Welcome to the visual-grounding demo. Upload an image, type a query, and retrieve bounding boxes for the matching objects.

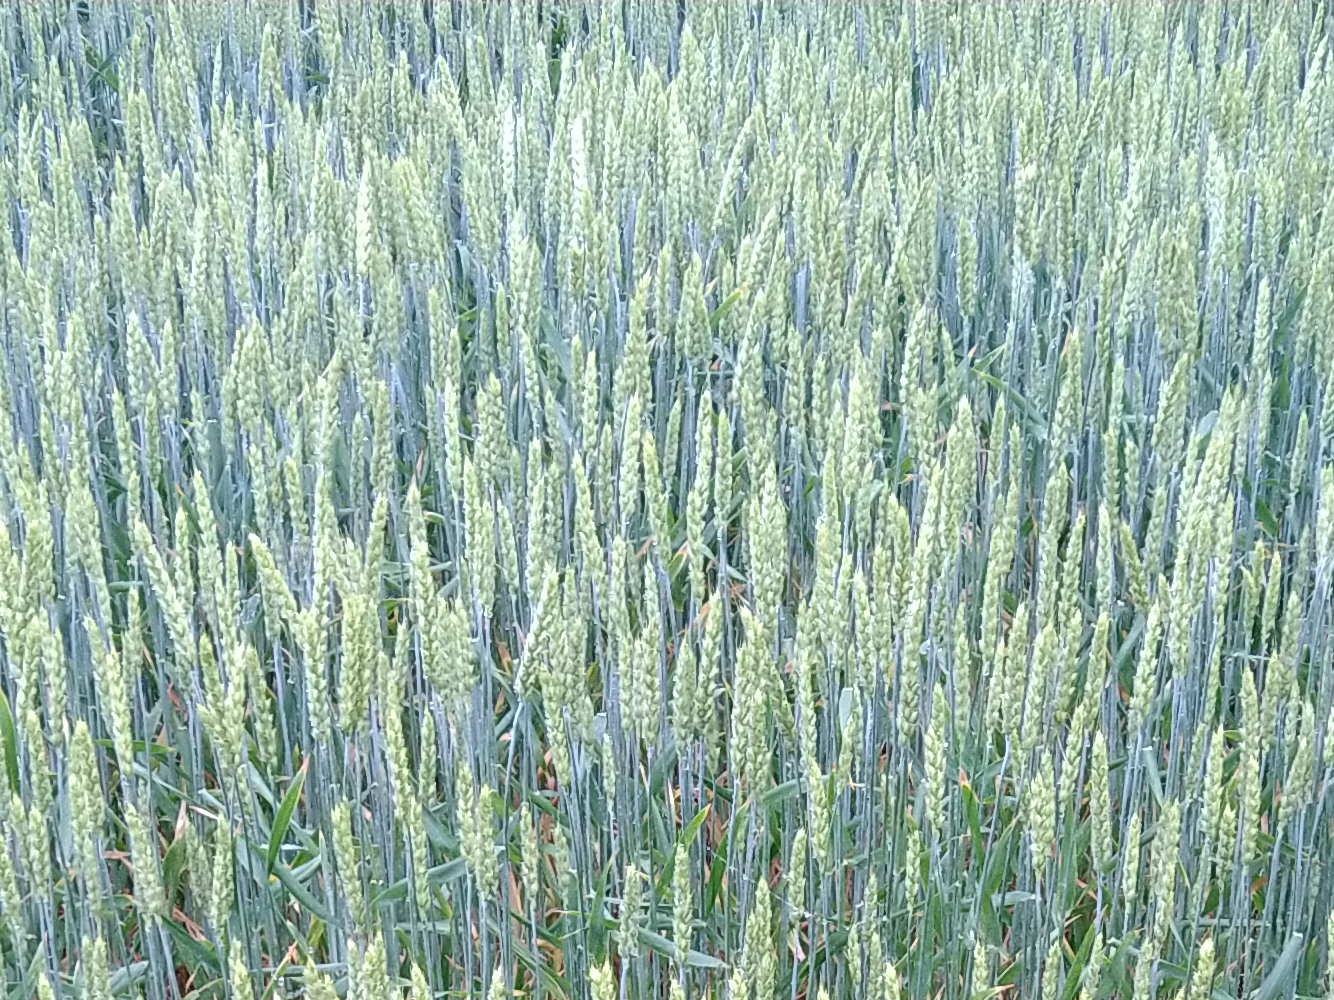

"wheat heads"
[210,103,225,178]
[916,396,930,477]
[841,118,851,181]
[188,0,204,63]
[1279,179,1287,238]
[509,221,523,311]
[1019,634,1047,738]
[187,825,210,917]
[618,869,639,949]
[404,125,415,161]
[641,557,665,641]
[249,321,280,421]
[764,416,779,448]
[64,255,76,312]
[0,0,6,38]
[1057,516,1086,634]
[343,137,354,192]
[1104,114,1112,156]
[36,540,54,608]
[557,163,571,281]
[529,250,545,340]
[824,448,843,548]
[335,183,350,241]
[993,493,1004,528]
[140,90,163,195]
[72,301,91,394]
[84,838,102,916]
[1116,32,1126,65]
[687,312,698,357]
[437,61,469,135]
[175,0,184,17]
[927,218,940,294]
[1000,326,1019,394]
[1077,153,1099,235]
[1026,164,1042,203]
[986,635,1003,728]
[45,129,58,189]
[1113,270,1126,350]
[761,0,769,59]
[930,311,940,350]
[230,0,244,57]
[906,383,918,459]
[1242,755,1255,861]
[771,500,787,574]
[197,181,206,214]
[318,378,325,431]
[854,689,863,772]
[174,511,191,609]
[927,391,938,465]
[1203,0,1220,16]
[1224,271,1244,363]
[95,359,106,395]
[128,587,141,656]
[1075,101,1089,135]
[1058,609,1083,705]
[1049,380,1069,472]
[171,276,181,353]
[773,40,781,97]
[1329,909,1334,1000]
[244,644,276,763]
[670,853,690,960]
[635,177,651,289]
[1044,945,1062,1000]
[928,545,960,644]
[873,265,883,324]
[1322,636,1334,755]
[188,88,208,139]
[368,0,387,18]
[620,636,633,732]
[1277,121,1288,162]
[1325,50,1334,86]
[734,298,750,335]
[899,250,918,307]
[570,336,587,436]
[223,645,249,722]
[869,403,883,450]
[704,9,716,39]
[456,44,464,79]
[813,67,828,122]
[583,92,595,149]
[1171,0,1182,31]
[875,485,886,542]
[586,3,600,46]
[56,160,67,247]
[515,325,541,413]
[1219,64,1234,106]
[903,41,916,84]
[0,45,12,105]
[1323,290,1334,372]
[890,509,911,624]
[854,112,888,197]
[1289,6,1298,54]
[685,493,707,600]
[836,553,852,619]
[871,47,880,84]
[69,472,89,562]
[910,220,926,299]
[597,426,615,517]
[1143,488,1168,566]
[1030,1,1043,55]
[630,0,641,44]
[701,39,719,114]
[521,476,546,602]
[283,101,299,165]
[693,392,715,506]
[481,500,494,607]
[868,937,883,1000]
[627,539,643,612]
[364,495,389,597]
[1251,0,1260,41]
[441,0,453,44]
[476,121,492,169]
[1231,137,1242,170]
[237,328,262,425]
[591,964,626,1000]
[859,9,875,48]
[821,185,834,223]
[118,0,128,27]
[273,197,284,271]
[733,0,741,52]
[331,803,366,926]
[393,51,411,136]
[456,760,473,867]
[855,466,871,536]
[716,4,726,74]
[102,0,114,32]
[433,597,450,691]
[961,126,978,218]
[1233,294,1260,364]
[1121,528,1147,611]
[262,428,282,525]
[796,0,810,31]
[301,364,313,462]
[564,90,579,157]
[981,397,1005,530]
[21,303,48,385]
[824,16,838,81]
[684,26,706,79]
[171,59,188,107]
[782,331,802,427]
[1113,87,1126,146]
[1243,572,1255,637]
[1260,651,1278,747]
[225,96,236,137]
[1159,198,1171,238]
[408,482,429,582]
[1203,729,1225,830]
[984,129,1004,223]
[1182,265,1199,350]
[1086,350,1104,426]
[193,210,215,298]
[791,169,808,257]
[932,682,950,740]
[1177,437,1200,535]
[1233,99,1243,144]
[115,153,146,302]
[1244,102,1255,128]
[523,91,542,159]
[1093,734,1107,847]
[826,106,835,141]
[635,318,652,413]
[39,539,52,599]
[40,0,56,27]
[1283,681,1299,748]
[766,259,787,362]
[954,218,976,312]
[441,288,459,340]
[447,38,457,76]
[222,287,234,374]
[645,623,662,743]
[701,158,723,231]
[1110,146,1128,204]
[1182,0,1198,40]
[1047,278,1064,342]
[938,0,945,39]
[1235,16,1247,60]
[521,244,539,329]
[1048,0,1066,56]
[568,182,591,285]
[1266,185,1280,254]
[0,522,13,639]
[386,712,406,811]
[1312,153,1328,208]
[70,391,89,488]
[211,818,235,931]
[1256,55,1271,118]
[1160,33,1172,82]
[45,631,69,746]
[712,116,756,239]
[808,589,817,660]
[883,45,893,85]
[857,407,867,469]
[497,86,509,112]
[923,325,931,383]
[40,421,76,488]
[1047,626,1058,694]
[1129,0,1146,52]
[689,135,706,213]
[112,390,134,474]
[853,84,864,137]
[414,563,439,677]
[10,257,35,311]
[1214,192,1231,260]
[758,954,778,1000]
[635,38,645,80]
[3,160,17,189]
[944,67,962,147]
[685,0,696,24]
[1103,432,1121,525]
[257,22,271,105]
[736,80,753,122]
[868,84,882,129]
[302,616,327,732]
[887,139,898,189]
[766,230,786,294]
[1009,422,1025,493]
[69,160,79,244]
[784,0,792,32]
[1031,209,1053,264]
[1175,64,1193,147]
[228,252,258,314]
[1320,83,1334,148]
[783,119,800,163]
[568,0,581,34]
[623,124,633,193]
[1291,100,1307,147]
[502,48,511,93]
[109,652,134,782]
[1096,263,1113,359]
[619,401,642,517]
[841,926,861,1000]
[758,64,767,98]
[1219,167,1232,209]
[853,570,872,699]
[878,0,897,32]
[1180,941,1216,1000]
[828,403,846,448]
[464,458,479,566]
[1169,25,1186,106]
[774,11,783,44]
[603,734,612,793]
[359,933,387,984]
[1174,223,1186,259]
[1052,121,1075,185]
[174,222,179,254]
[241,8,254,55]
[646,38,657,67]
[416,22,434,74]
[805,138,820,199]
[280,237,290,282]
[477,37,495,110]
[1260,0,1276,34]
[1204,24,1216,90]
[396,0,406,32]
[1157,111,1175,188]
[41,479,49,541]
[1010,261,1022,327]
[1024,207,1039,257]
[1019,3,1029,39]
[539,41,556,136]
[271,133,286,191]
[926,69,940,109]
[620,67,635,122]
[1157,574,1172,629]
[190,389,210,457]
[1148,80,1166,149]
[118,56,126,123]
[319,386,341,470]
[860,874,877,946]
[810,30,825,66]
[1302,145,1317,196]
[601,113,619,210]
[833,143,842,176]
[88,0,101,61]
[68,61,80,123]
[1190,202,1204,264]
[819,140,835,186]
[159,259,174,328]
[486,116,501,184]
[747,211,780,304]
[395,292,406,341]
[70,942,93,1000]
[569,116,587,192]
[672,642,697,730]
[950,148,970,209]
[611,365,627,450]
[311,137,332,230]
[1254,196,1266,261]
[1063,37,1075,73]
[1301,37,1329,132]
[555,55,574,124]
[931,139,947,184]
[814,356,826,450]
[1325,107,1334,207]
[906,0,918,39]
[637,110,647,188]
[378,154,391,249]
[83,736,105,826]
[939,326,956,389]
[321,96,329,132]
[418,709,436,804]
[1219,430,1234,499]
[807,111,824,138]
[86,623,112,737]
[805,58,819,102]
[1048,0,1058,25]
[544,466,563,563]
[634,274,651,313]
[978,356,986,416]
[1054,22,1067,65]
[518,82,530,125]
[668,0,684,34]
[110,218,124,285]
[473,390,487,472]
[226,541,243,616]
[426,390,440,471]
[818,0,828,35]
[0,413,27,504]
[1274,35,1287,101]
[599,218,609,311]
[1178,158,1192,230]
[648,190,661,254]
[462,110,481,138]
[1216,95,1239,142]
[1307,3,1325,67]
[444,382,462,489]
[798,114,813,149]
[1195,81,1218,153]
[317,0,335,55]
[614,116,636,190]
[228,328,250,389]
[389,624,413,704]
[696,294,713,355]
[342,188,359,283]
[333,285,348,367]
[474,1,486,41]
[642,0,654,35]
[658,15,670,69]
[736,910,755,981]
[211,248,226,312]
[809,0,817,30]
[749,504,775,614]
[618,299,641,402]
[21,442,40,501]
[250,13,268,65]
[764,462,776,522]
[1290,412,1308,488]
[22,161,39,214]
[116,56,130,120]
[600,0,614,66]
[167,0,199,103]
[1073,259,1099,348]
[343,940,364,1000]
[557,973,566,1000]
[850,347,864,382]
[194,140,225,190]
[694,598,724,720]
[1183,84,1197,157]
[463,0,475,39]
[579,571,593,622]
[60,323,75,424]
[498,0,510,50]
[158,109,170,137]
[952,634,968,738]
[1051,75,1077,148]
[539,123,570,236]
[91,213,111,294]
[753,105,777,183]
[529,438,538,496]
[1115,208,1137,269]
[6,551,28,661]
[360,967,384,1000]
[1104,160,1113,203]
[882,963,900,1000]
[801,663,813,775]
[1262,551,1281,634]
[17,514,41,627]
[946,22,962,70]
[298,187,310,238]
[563,567,575,621]
[403,797,431,907]
[125,312,141,404]
[973,946,988,1000]
[437,93,463,142]
[1181,727,1209,801]
[655,192,666,252]
[1151,813,1167,896]
[1289,160,1303,228]
[996,0,1007,70]
[284,268,306,346]
[1046,203,1057,276]
[258,571,281,641]
[522,808,536,899]
[840,720,855,789]
[748,49,758,87]
[1229,174,1256,268]
[77,267,94,335]
[788,24,802,55]
[644,58,656,86]
[750,688,768,826]
[879,178,930,318]
[1066,76,1110,194]
[643,429,673,557]
[1169,248,1192,327]
[271,81,289,125]
[1082,614,1110,726]
[146,393,158,484]
[1121,812,1142,899]
[1225,0,1241,29]
[1254,539,1265,584]
[213,38,223,106]
[1228,28,1239,75]
[301,227,315,301]
[745,29,760,74]
[477,306,493,372]
[133,37,141,82]
[916,103,933,178]
[1155,400,1177,470]
[1259,91,1273,176]
[867,3,879,50]
[1132,194,1149,237]
[604,536,625,640]
[305,960,331,1000]
[570,452,591,566]
[1251,276,1270,379]
[413,964,442,1000]
[877,142,888,184]
[466,139,480,182]
[755,448,770,494]
[1133,368,1144,445]
[765,81,782,160]
[1097,504,1111,613]
[280,0,295,63]
[849,23,859,74]
[0,337,9,411]
[806,195,824,290]
[713,415,734,531]
[542,395,564,456]
[518,115,531,205]
[904,77,915,152]
[302,125,317,190]
[156,192,172,267]
[918,468,945,552]
[253,116,272,191]
[1089,935,1103,993]
[529,44,537,85]
[0,828,25,950]
[242,148,258,221]
[982,12,997,90]
[1090,58,1104,93]
[271,315,283,370]
[19,99,28,157]
[942,186,957,224]
[496,285,510,381]
[1031,323,1043,398]
[954,401,975,529]
[815,652,828,695]
[908,831,922,906]
[315,234,328,285]
[358,10,369,52]
[511,572,558,695]
[1150,7,1165,72]
[646,119,660,180]
[263,0,277,29]
[150,0,160,25]
[479,265,492,308]
[200,548,216,637]
[221,0,232,43]
[1140,222,1159,313]
[662,400,682,484]
[1315,464,1334,564]
[58,128,71,167]
[350,412,365,541]
[1271,244,1300,312]
[199,635,222,707]
[160,321,177,419]
[528,49,542,99]
[673,30,687,108]
[81,118,97,184]
[1325,352,1334,431]
[409,93,424,163]
[216,579,238,672]
[314,7,325,58]
[1126,607,1157,726]
[128,475,142,544]
[268,49,282,84]
[152,38,162,111]
[432,157,445,210]
[1251,129,1259,156]
[97,288,111,332]
[175,257,196,308]
[8,311,26,384]
[125,0,144,26]
[1314,188,1334,273]
[43,250,63,325]
[372,70,396,138]
[1294,277,1319,367]
[842,76,864,129]
[451,604,472,689]
[256,160,271,278]
[741,607,793,730]
[1205,266,1223,359]
[379,652,391,722]
[1067,332,1082,440]
[339,122,357,189]
[1012,165,1030,259]
[93,935,113,1000]
[15,612,43,729]
[240,90,253,139]
[1199,634,1222,721]
[657,96,671,204]
[1034,529,1058,630]
[865,332,885,395]
[292,1,305,75]
[1133,945,1156,1000]
[341,1,348,34]
[575,275,586,331]
[1164,551,1187,663]
[1300,0,1312,46]
[894,88,907,165]
[594,68,609,145]
[607,30,628,117]
[1302,701,1315,746]
[472,782,492,895]
[556,826,568,883]
[284,459,305,545]
[576,62,587,97]
[927,0,942,55]
[881,78,894,128]
[877,9,886,48]
[894,170,907,210]
[1129,160,1153,205]
[42,201,63,263]
[655,0,665,21]
[1003,603,1027,729]
[1131,74,1153,172]
[547,343,556,391]
[854,183,876,267]
[139,336,160,386]
[484,378,506,482]
[406,164,437,263]
[1006,731,1034,813]
[366,292,388,367]
[433,1,440,27]
[336,85,347,119]
[1243,66,1261,108]
[1151,353,1189,448]
[58,0,66,24]
[464,35,481,105]
[1156,803,1180,937]
[1026,17,1038,84]
[209,0,224,55]
[1279,592,1299,679]
[474,506,484,600]
[742,0,751,38]
[730,43,749,86]
[848,643,857,686]
[6,134,24,173]
[1090,44,1102,65]
[436,207,451,265]
[914,0,925,51]
[815,515,838,655]
[844,257,873,338]
[279,400,300,461]
[1204,137,1218,217]
[427,287,447,384]
[21,0,44,59]
[566,619,587,718]
[221,717,259,838]
[28,806,51,902]
[165,78,184,143]
[464,180,487,257]
[1284,58,1300,111]
[1085,224,1104,261]
[831,607,848,667]
[310,495,337,616]
[88,538,113,624]
[249,447,268,531]
[884,492,899,571]
[119,798,160,901]
[349,0,363,49]
[75,176,90,233]
[133,521,194,670]
[505,194,516,245]
[1214,495,1237,614]
[881,171,899,242]
[719,261,734,342]
[125,98,139,178]
[1193,512,1212,609]
[1197,17,1208,86]
[1055,180,1073,287]
[404,0,418,44]
[344,50,357,95]
[530,144,556,186]
[510,7,521,67]
[609,214,620,280]
[830,0,839,24]
[121,633,134,702]
[557,264,574,315]
[69,118,82,176]
[546,608,563,664]
[674,263,701,353]
[581,527,606,616]
[739,235,752,284]
[965,9,984,70]
[996,103,1008,161]
[1234,402,1250,481]
[141,231,160,334]
[1314,301,1328,379]
[63,511,77,591]
[1243,670,1258,753]
[637,77,649,118]
[730,971,746,1000]
[745,396,758,453]
[655,248,672,339]
[890,288,900,335]
[1237,52,1248,90]
[820,222,844,338]
[201,1,211,56]
[193,471,222,569]
[337,596,359,732]
[165,174,189,244]
[1126,439,1138,506]
[731,299,769,398]
[446,327,460,398]
[1326,226,1334,290]
[1012,52,1022,129]
[1172,365,1189,471]
[649,78,664,138]
[327,30,344,114]
[1087,0,1104,50]
[1055,709,1087,814]
[140,792,152,858]
[981,531,1005,661]
[1301,84,1325,144]
[478,970,507,1000]
[25,267,44,323]
[1219,804,1237,870]
[238,220,249,265]
[1158,238,1174,329]
[162,30,180,93]
[1273,0,1293,33]
[1112,54,1122,81]
[923,723,948,809]
[1179,400,1231,547]
[741,500,749,574]
[874,543,893,683]
[1014,124,1027,174]
[0,238,7,288]
[1292,528,1311,591]
[881,327,896,379]
[615,0,626,47]
[354,605,382,715]
[905,161,918,205]
[1028,750,1053,860]
[66,725,86,875]
[386,287,399,352]
[353,147,376,273]
[582,352,600,442]
[234,139,248,167]
[835,32,850,107]
[42,314,59,410]
[1119,245,1143,323]
[134,13,150,55]
[327,170,338,270]
[746,451,758,506]
[910,549,931,612]
[954,594,969,646]
[1005,11,1018,61]
[540,663,567,781]
[86,488,100,541]
[27,207,45,278]
[229,146,245,214]
[704,708,720,769]
[787,832,807,918]
[698,0,704,39]
[305,105,321,134]
[811,760,826,859]
[942,426,959,552]
[798,28,807,55]
[929,95,944,142]
[539,0,553,55]
[24,708,57,823]
[900,308,929,405]
[47,56,66,134]
[391,163,416,278]
[780,259,792,296]
[383,0,395,12]
[418,136,431,186]
[1246,153,1258,180]
[790,45,807,107]
[773,153,784,209]
[1075,0,1088,33]
[846,389,860,490]
[1023,266,1035,307]
[85,295,97,349]
[895,39,901,84]
[1108,352,1127,435]
[1207,439,1226,499]
[373,32,387,69]
[1296,220,1308,287]
[726,645,758,775]
[960,52,981,132]
[1277,741,1311,829]
[644,560,664,622]
[822,113,834,140]
[293,101,303,142]
[1106,7,1125,57]
[781,169,800,212]
[1241,0,1254,30]
[843,0,855,25]
[210,308,226,374]
[1300,196,1314,254]
[525,2,540,42]
[585,213,600,299]
[485,0,498,38]
[1078,36,1091,106]
[785,45,795,102]
[1014,5,1029,37]
[898,601,922,742]
[1042,474,1055,531]
[437,99,447,170]
[1188,162,1204,224]
[1020,81,1034,127]
[425,80,440,166]
[1118,0,1135,30]
[501,106,517,189]
[331,538,364,597]
[211,195,235,248]
[666,88,684,235]
[1051,467,1069,532]
[719,99,739,150]
[689,70,704,134]
[680,124,694,234]
[221,376,237,451]
[200,707,243,836]
[183,305,203,392]
[497,499,514,591]
[1116,71,1133,103]
[0,729,7,814]
[2,229,18,260]
[30,110,45,151]
[1258,373,1272,449]
[1031,93,1045,159]
[249,536,293,616]
[481,165,501,262]
[11,794,29,905]
[1005,480,1019,564]
[755,392,765,440]
[721,201,736,243]
[182,186,194,225]
[349,319,371,412]
[987,86,1008,126]
[747,163,760,230]
[0,186,10,241]
[922,185,941,221]
[755,877,772,961]
[286,177,300,233]
[351,80,371,171]
[511,448,527,494]
[791,598,806,701]
[229,961,257,1000]
[631,638,650,717]
[371,384,392,487]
